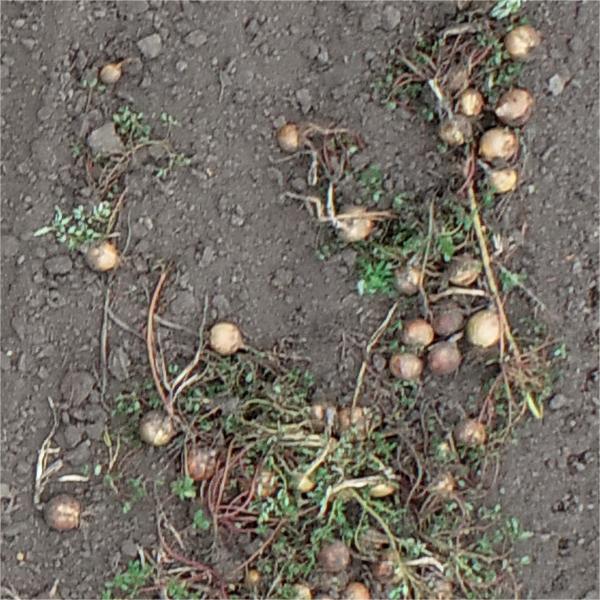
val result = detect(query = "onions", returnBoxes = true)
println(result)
[493,87,531,125]
[243,563,263,584]
[318,543,349,574]
[339,206,382,242]
[372,546,407,580]
[97,59,121,83]
[341,404,371,439]
[454,416,486,445]
[391,262,423,293]
[503,22,538,58]
[44,495,81,532]
[430,441,450,461]
[459,89,485,114]
[287,583,311,600]
[183,441,218,478]
[432,302,465,336]
[388,353,424,379]
[87,238,119,270]
[207,320,242,354]
[136,409,173,446]
[419,574,453,600]
[401,316,433,346]
[293,470,320,490]
[245,459,282,498]
[436,116,470,147]
[431,469,455,494]
[343,580,369,599]
[274,121,300,149]
[308,404,336,432]
[466,311,502,347]
[479,127,517,162]
[426,341,460,375]
[447,256,478,286]
[368,482,395,499]
[486,166,516,193]
[354,525,381,552]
